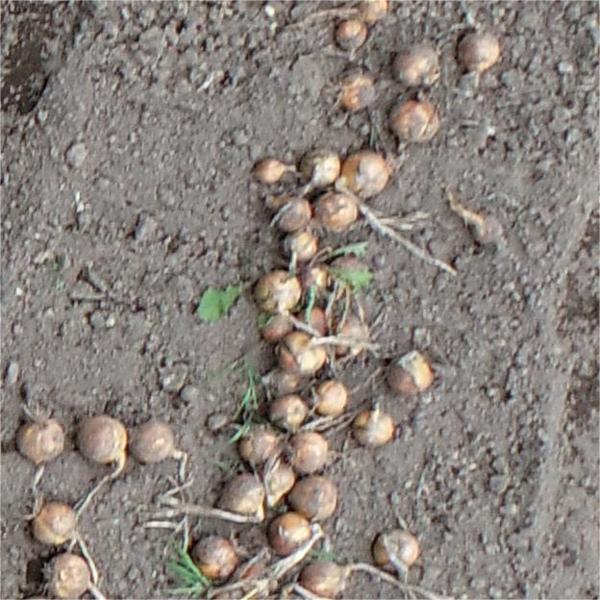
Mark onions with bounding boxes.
[337,73,376,111]
[252,270,299,312]
[334,17,364,46]
[262,312,292,341]
[269,393,308,430]
[388,352,433,395]
[302,149,340,189]
[313,379,347,415]
[288,430,328,473]
[371,529,417,570]
[359,0,382,23]
[332,255,370,276]
[77,417,127,461]
[18,420,65,461]
[456,30,499,70]
[291,477,336,520]
[271,367,302,395]
[253,156,287,184]
[130,419,172,461]
[297,266,333,306]
[354,405,393,444]
[284,229,317,260]
[31,501,75,544]
[191,535,237,583]
[344,151,390,195]
[298,309,325,336]
[299,558,345,597]
[277,333,324,376]
[317,192,357,231]
[268,512,309,553]
[219,472,265,517]
[395,46,438,87]
[238,424,275,464]
[233,563,278,595]
[275,200,310,234]
[261,462,294,496]
[338,319,371,351]
[48,554,92,594]
[391,98,439,142]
